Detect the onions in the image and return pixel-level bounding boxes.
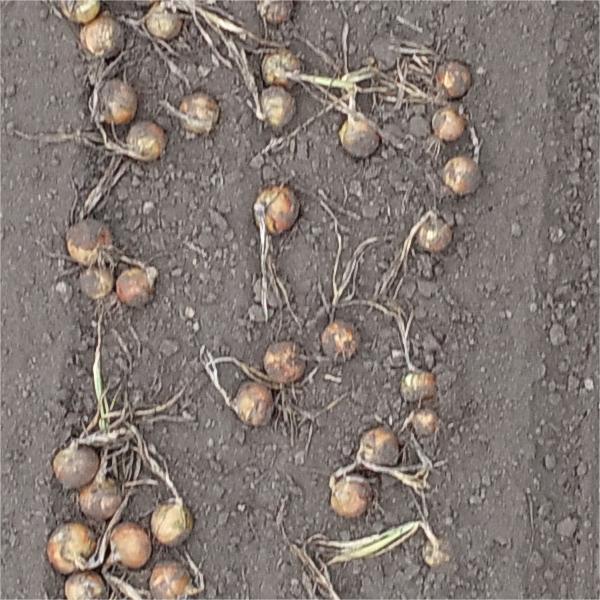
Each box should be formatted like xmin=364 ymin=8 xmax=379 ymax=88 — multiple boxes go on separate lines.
xmin=408 ymin=407 xmax=438 ymax=434
xmin=257 ymin=89 xmax=292 ymax=125
xmin=67 ymin=220 xmax=109 ymax=261
xmin=439 ymin=155 xmax=478 ymax=195
xmin=81 ymin=16 xmax=119 ymax=55
xmin=264 ymin=340 xmax=303 ymax=382
xmin=114 ymin=266 xmax=151 ymax=306
xmin=48 ymin=523 xmax=95 ymax=571
xmin=258 ymin=0 xmax=292 ymax=24
xmin=263 ymin=50 xmax=298 ymax=85
xmin=231 ymin=383 xmax=271 ymax=425
xmin=434 ymin=60 xmax=469 ymax=97
xmin=414 ymin=213 xmax=451 ymax=251
xmin=175 ymin=90 xmax=215 ymax=134
xmin=431 ymin=105 xmax=464 ymax=139
xmin=78 ymin=266 xmax=112 ymax=298
xmin=123 ymin=119 xmax=163 ymax=160
xmin=150 ymin=503 xmax=191 ymax=544
xmin=254 ymin=186 xmax=298 ymax=232
xmin=95 ymin=78 xmax=137 ymax=123
xmin=143 ymin=4 xmax=179 ymax=39
xmin=337 ymin=112 xmax=379 ymax=155
xmin=319 ymin=320 xmax=356 ymax=357
xmin=79 ymin=477 xmax=121 ymax=516
xmin=63 ymin=570 xmax=104 ymax=599
xmin=146 ymin=559 xmax=191 ymax=595
xmin=328 ymin=471 xmax=372 ymax=514
xmin=400 ymin=369 xmax=435 ymax=402
xmin=111 ymin=523 xmax=151 ymax=567
xmin=357 ymin=423 xmax=397 ymax=467
xmin=50 ymin=442 xmax=97 ymax=487
xmin=61 ymin=0 xmax=100 ymax=23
